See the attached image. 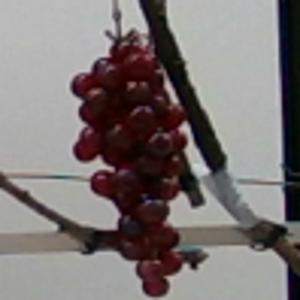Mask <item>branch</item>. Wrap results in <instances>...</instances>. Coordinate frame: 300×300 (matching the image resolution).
<instances>
[{
  "instance_id": "branch-1",
  "label": "branch",
  "mask_w": 300,
  "mask_h": 300,
  "mask_svg": "<svg viewBox=\"0 0 300 300\" xmlns=\"http://www.w3.org/2000/svg\"><path fill=\"white\" fill-rule=\"evenodd\" d=\"M147 26L148 43L144 44L158 54L161 67L176 101L186 111L185 121L191 141L209 172L197 175L188 154L183 150L184 175L180 181L181 194L190 210L207 205L201 184L217 204L236 222L248 248L252 252L268 250L280 258L300 276V253L289 244L287 225L256 214L237 190L229 172V158L216 134L215 127L202 105L193 83L190 62L179 46L168 14V0H136Z\"/></svg>"
},
{
  "instance_id": "branch-2",
  "label": "branch",
  "mask_w": 300,
  "mask_h": 300,
  "mask_svg": "<svg viewBox=\"0 0 300 300\" xmlns=\"http://www.w3.org/2000/svg\"><path fill=\"white\" fill-rule=\"evenodd\" d=\"M0 190L6 192L16 202L22 204L46 222L56 225L58 234H65L68 239L76 240L80 254L95 255L96 252L118 254L117 244L121 236L117 229H99L90 225H83L62 215L32 196L31 190L21 189L1 170Z\"/></svg>"
},
{
  "instance_id": "branch-3",
  "label": "branch",
  "mask_w": 300,
  "mask_h": 300,
  "mask_svg": "<svg viewBox=\"0 0 300 300\" xmlns=\"http://www.w3.org/2000/svg\"><path fill=\"white\" fill-rule=\"evenodd\" d=\"M177 251L182 255L183 265H188V270L194 273L200 271V265L205 264L211 257L210 252L204 251L201 247H193L190 249L182 248Z\"/></svg>"
}]
</instances>
